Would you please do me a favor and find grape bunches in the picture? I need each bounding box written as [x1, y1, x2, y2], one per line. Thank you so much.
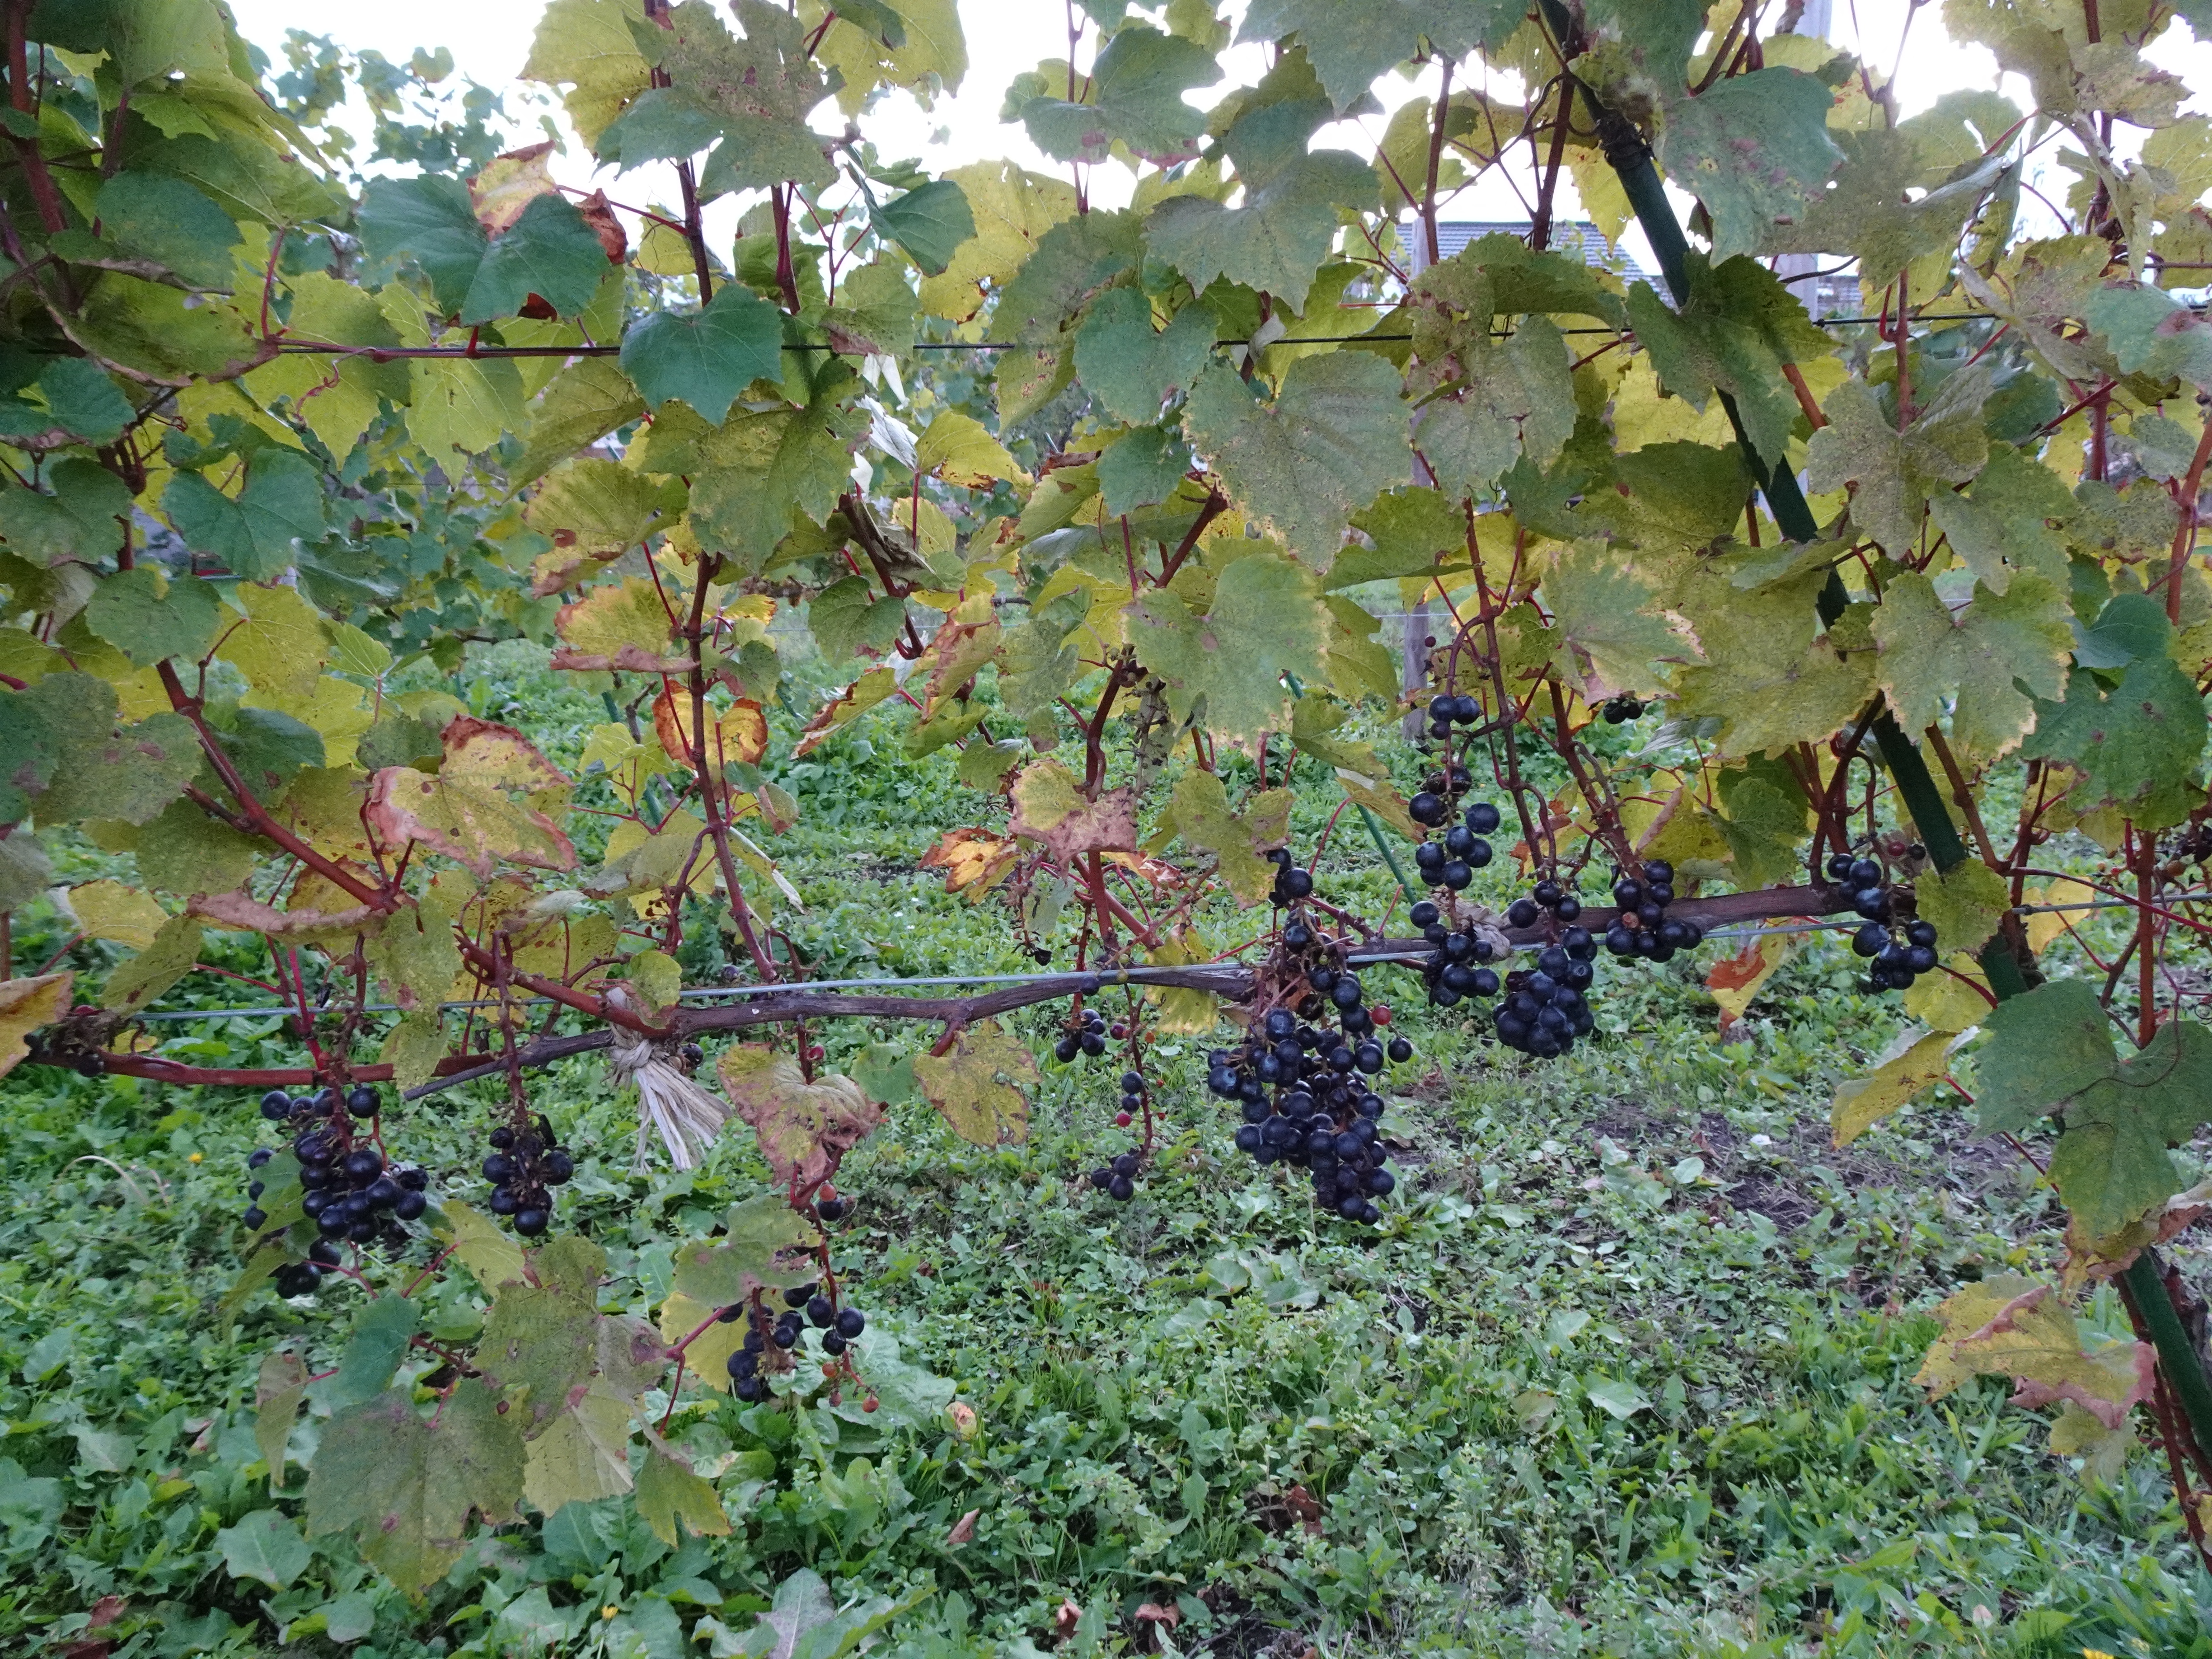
[261, 1082, 429, 1249]
[1826, 831, 1934, 995]
[1090, 1026, 1165, 1201]
[666, 1038, 712, 1079]
[1405, 902, 1503, 1013]
[1205, 1012, 1316, 1107]
[480, 1124, 574, 1239]
[1263, 849, 1413, 1074]
[731, 570, 819, 614]
[1493, 881, 1598, 1060]
[1604, 857, 1702, 962]
[730, 1305, 807, 1404]
[1822, 720, 1885, 774]
[1052, 1005, 1106, 1062]
[1593, 690, 1657, 728]
[785, 1195, 887, 1418]
[22, 1018, 111, 1077]
[1079, 942, 1138, 998]
[1235, 1073, 1396, 1227]
[246, 1153, 349, 1305]
[1405, 693, 1502, 893]
[869, 559, 918, 615]
[2160, 816, 2212, 889]
[186, 1556, 302, 1617]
